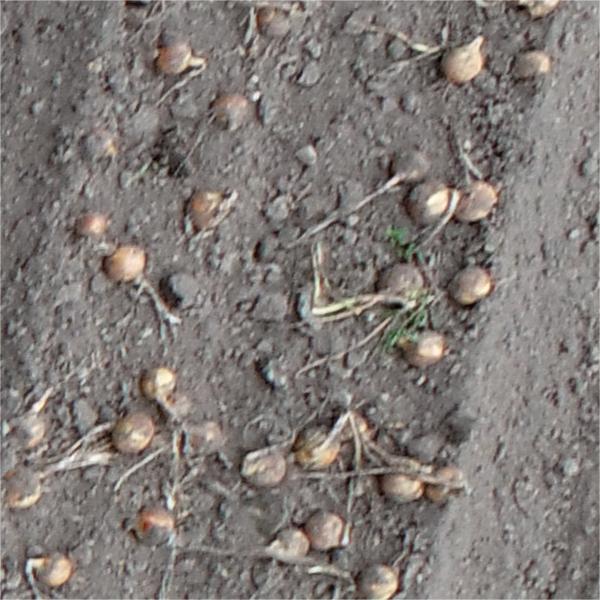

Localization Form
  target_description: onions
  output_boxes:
[259,10,288,36]
[393,150,430,183]
[454,182,494,221]
[213,93,256,128]
[272,528,305,559]
[34,554,74,586]
[139,365,176,401]
[305,510,345,550]
[188,186,232,231]
[412,184,448,221]
[133,502,172,540]
[10,416,45,447]
[356,561,398,595]
[516,50,552,78]
[448,265,490,304]
[111,408,154,452]
[4,474,42,512]
[242,445,288,488]
[297,434,341,469]
[197,420,223,450]
[441,39,482,83]
[407,329,445,365]
[381,261,425,298]
[426,462,464,502]
[103,245,145,281]
[158,37,195,73]
[522,0,557,15]
[383,472,418,502]
[75,210,108,237]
